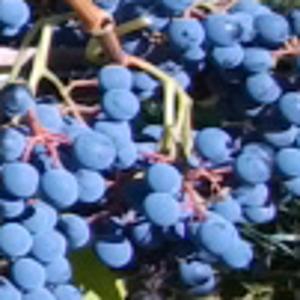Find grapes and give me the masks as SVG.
Returning a JSON list of instances; mask_svg holds the SVG:
<instances>
[{"instance_id": "01657485", "label": "grapes", "mask_w": 300, "mask_h": 300, "mask_svg": "<svg viewBox=\"0 0 300 300\" xmlns=\"http://www.w3.org/2000/svg\"><path fill=\"white\" fill-rule=\"evenodd\" d=\"M115 26L145 16L166 33L175 59L160 68L187 92L211 67L231 85L234 111L262 126L201 130L134 122L141 102L158 96V79L121 64L97 69L100 112L89 127L54 96L31 98L21 83L0 90V300H85L70 282L71 254L92 247L103 266L131 271L139 253L185 238L198 260L179 279L207 296L217 263L248 272L255 262L241 223L269 226L280 217L271 183L300 201V89L272 68L271 51L300 36V10L286 16L259 0H236L202 19L184 16L195 0H95Z\"/></svg>"}, {"instance_id": "0513c4c2", "label": "grapes", "mask_w": 300, "mask_h": 300, "mask_svg": "<svg viewBox=\"0 0 300 300\" xmlns=\"http://www.w3.org/2000/svg\"><path fill=\"white\" fill-rule=\"evenodd\" d=\"M150 45V38L141 30L130 31L120 39V46L131 57L143 54Z\"/></svg>"}, {"instance_id": "b958b902", "label": "grapes", "mask_w": 300, "mask_h": 300, "mask_svg": "<svg viewBox=\"0 0 300 300\" xmlns=\"http://www.w3.org/2000/svg\"><path fill=\"white\" fill-rule=\"evenodd\" d=\"M33 20L29 0H0V34L7 39L20 36Z\"/></svg>"}]
</instances>
